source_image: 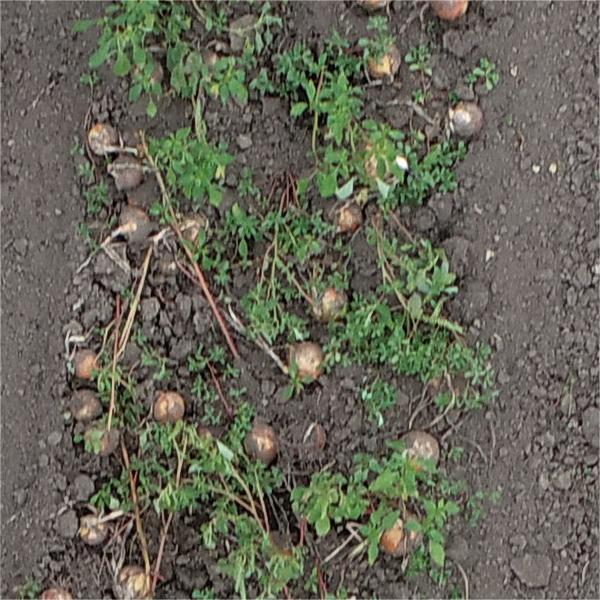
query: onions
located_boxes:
[115,563,151,595]
[70,349,99,378]
[78,515,108,545]
[185,48,218,72]
[362,45,401,78]
[315,284,347,316]
[78,424,117,455]
[132,55,163,89]
[66,388,97,421]
[392,430,436,476]
[86,120,119,155]
[241,423,279,462]
[174,209,210,246]
[111,156,141,190]
[354,0,392,11]
[283,342,323,386]
[448,100,480,138]
[328,200,362,233]
[109,205,147,243]
[425,0,465,22]
[150,389,184,422]
[378,526,409,555]
[158,248,187,275]
[43,584,72,599]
